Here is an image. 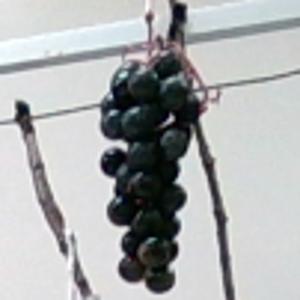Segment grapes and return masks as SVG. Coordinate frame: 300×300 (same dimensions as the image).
<instances>
[{"instance_id": "grapes-1", "label": "grapes", "mask_w": 300, "mask_h": 300, "mask_svg": "<svg viewBox=\"0 0 300 300\" xmlns=\"http://www.w3.org/2000/svg\"><path fill=\"white\" fill-rule=\"evenodd\" d=\"M182 67L180 52L171 46L159 48L147 63L124 61L99 107L102 134L131 146L128 153L108 148L99 161L101 173L116 182L106 219L130 229L121 240L126 255L117 272L128 283L144 280L155 293L170 291L176 282L168 264L180 252L176 213L187 201L176 181L193 136L191 124L203 113L201 98L188 92V81L179 74Z\"/></svg>"}]
</instances>
